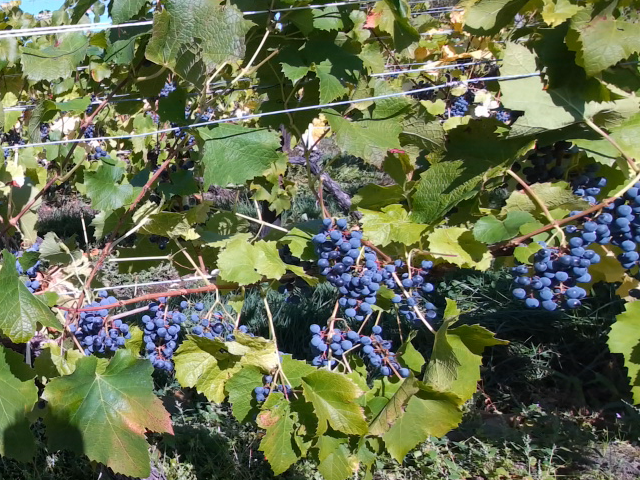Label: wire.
<instances>
[{
    "label": "wire",
    "instance_id": "wire-3",
    "mask_svg": "<svg viewBox=\"0 0 640 480\" xmlns=\"http://www.w3.org/2000/svg\"><path fill=\"white\" fill-rule=\"evenodd\" d=\"M364 0H347V1H339L333 3H322V4H309L304 6H291L285 8H272V9H264V10H245L243 12L244 16L248 15H266V14H274V13H287L293 11H307L311 9H325V8H335L349 5H358L363 4Z\"/></svg>",
    "mask_w": 640,
    "mask_h": 480
},
{
    "label": "wire",
    "instance_id": "wire-4",
    "mask_svg": "<svg viewBox=\"0 0 640 480\" xmlns=\"http://www.w3.org/2000/svg\"><path fill=\"white\" fill-rule=\"evenodd\" d=\"M203 279L202 275L198 276H181L174 277L169 279H161L155 280L147 283H111L109 285L93 287V292H103L107 290H111L113 288H150L157 285L171 284L176 282H184V281H201Z\"/></svg>",
    "mask_w": 640,
    "mask_h": 480
},
{
    "label": "wire",
    "instance_id": "wire-2",
    "mask_svg": "<svg viewBox=\"0 0 640 480\" xmlns=\"http://www.w3.org/2000/svg\"><path fill=\"white\" fill-rule=\"evenodd\" d=\"M154 20L131 21L119 25L109 26L108 22L84 25H64V26H43L36 29H5L0 30V39H10L17 37H35L40 35H64L77 32H88L92 30L116 31L133 26L154 25Z\"/></svg>",
    "mask_w": 640,
    "mask_h": 480
},
{
    "label": "wire",
    "instance_id": "wire-1",
    "mask_svg": "<svg viewBox=\"0 0 640 480\" xmlns=\"http://www.w3.org/2000/svg\"><path fill=\"white\" fill-rule=\"evenodd\" d=\"M536 75L541 76L542 72L540 70H534V71L522 73V74L463 78L460 80L449 81L443 84L418 86V87H415L414 89H410L407 91L365 95L362 97H356V98H351L346 100L332 101V102L321 103V104H310L303 107L282 108V109H276L272 111L252 113L243 117H230V118H222L218 120H208L201 123H194V124L181 126V127L170 126L169 128L157 130V131H137V132H128L120 135H110L106 137H81V138H72L67 140H50V141H42V142H36V143H24V144H18V145H3L2 149L3 150H20V149L38 148V147L52 146V145H70L74 143H86V142H108L112 140H122L130 137H139V136H159V135H164L171 132H183V131H189L196 128H203L210 125H221V124L233 123V122H245L255 118L274 116V115L284 114V113L294 114L297 112H306L312 109H323V108L348 105V104L364 102L368 100H375V99L395 98V97L416 94L417 92L442 90L448 87L462 85L465 83L524 79V78H529Z\"/></svg>",
    "mask_w": 640,
    "mask_h": 480
}]
</instances>
